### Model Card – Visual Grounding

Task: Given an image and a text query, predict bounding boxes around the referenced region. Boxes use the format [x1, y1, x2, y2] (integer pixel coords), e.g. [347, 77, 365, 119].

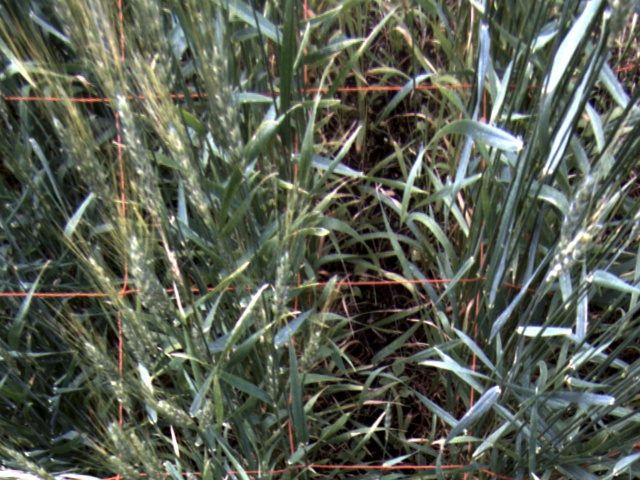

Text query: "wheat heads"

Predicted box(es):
[158, 106, 209, 214]
[93, 261, 123, 307]
[5, 447, 47, 476]
[556, 179, 590, 241]
[190, 329, 211, 366]
[80, 14, 116, 81]
[210, 44, 249, 171]
[157, 399, 192, 426]
[147, 278, 176, 323]
[272, 253, 289, 310]
[199, 401, 212, 430]
[548, 228, 595, 277]
[129, 234, 143, 282]
[84, 345, 120, 379]
[103, 422, 134, 459]
[139, 0, 161, 45]
[130, 311, 159, 356]
[263, 352, 278, 398]
[55, 120, 110, 202]
[110, 381, 129, 410]
[114, 99, 151, 174]
[136, 436, 162, 475]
